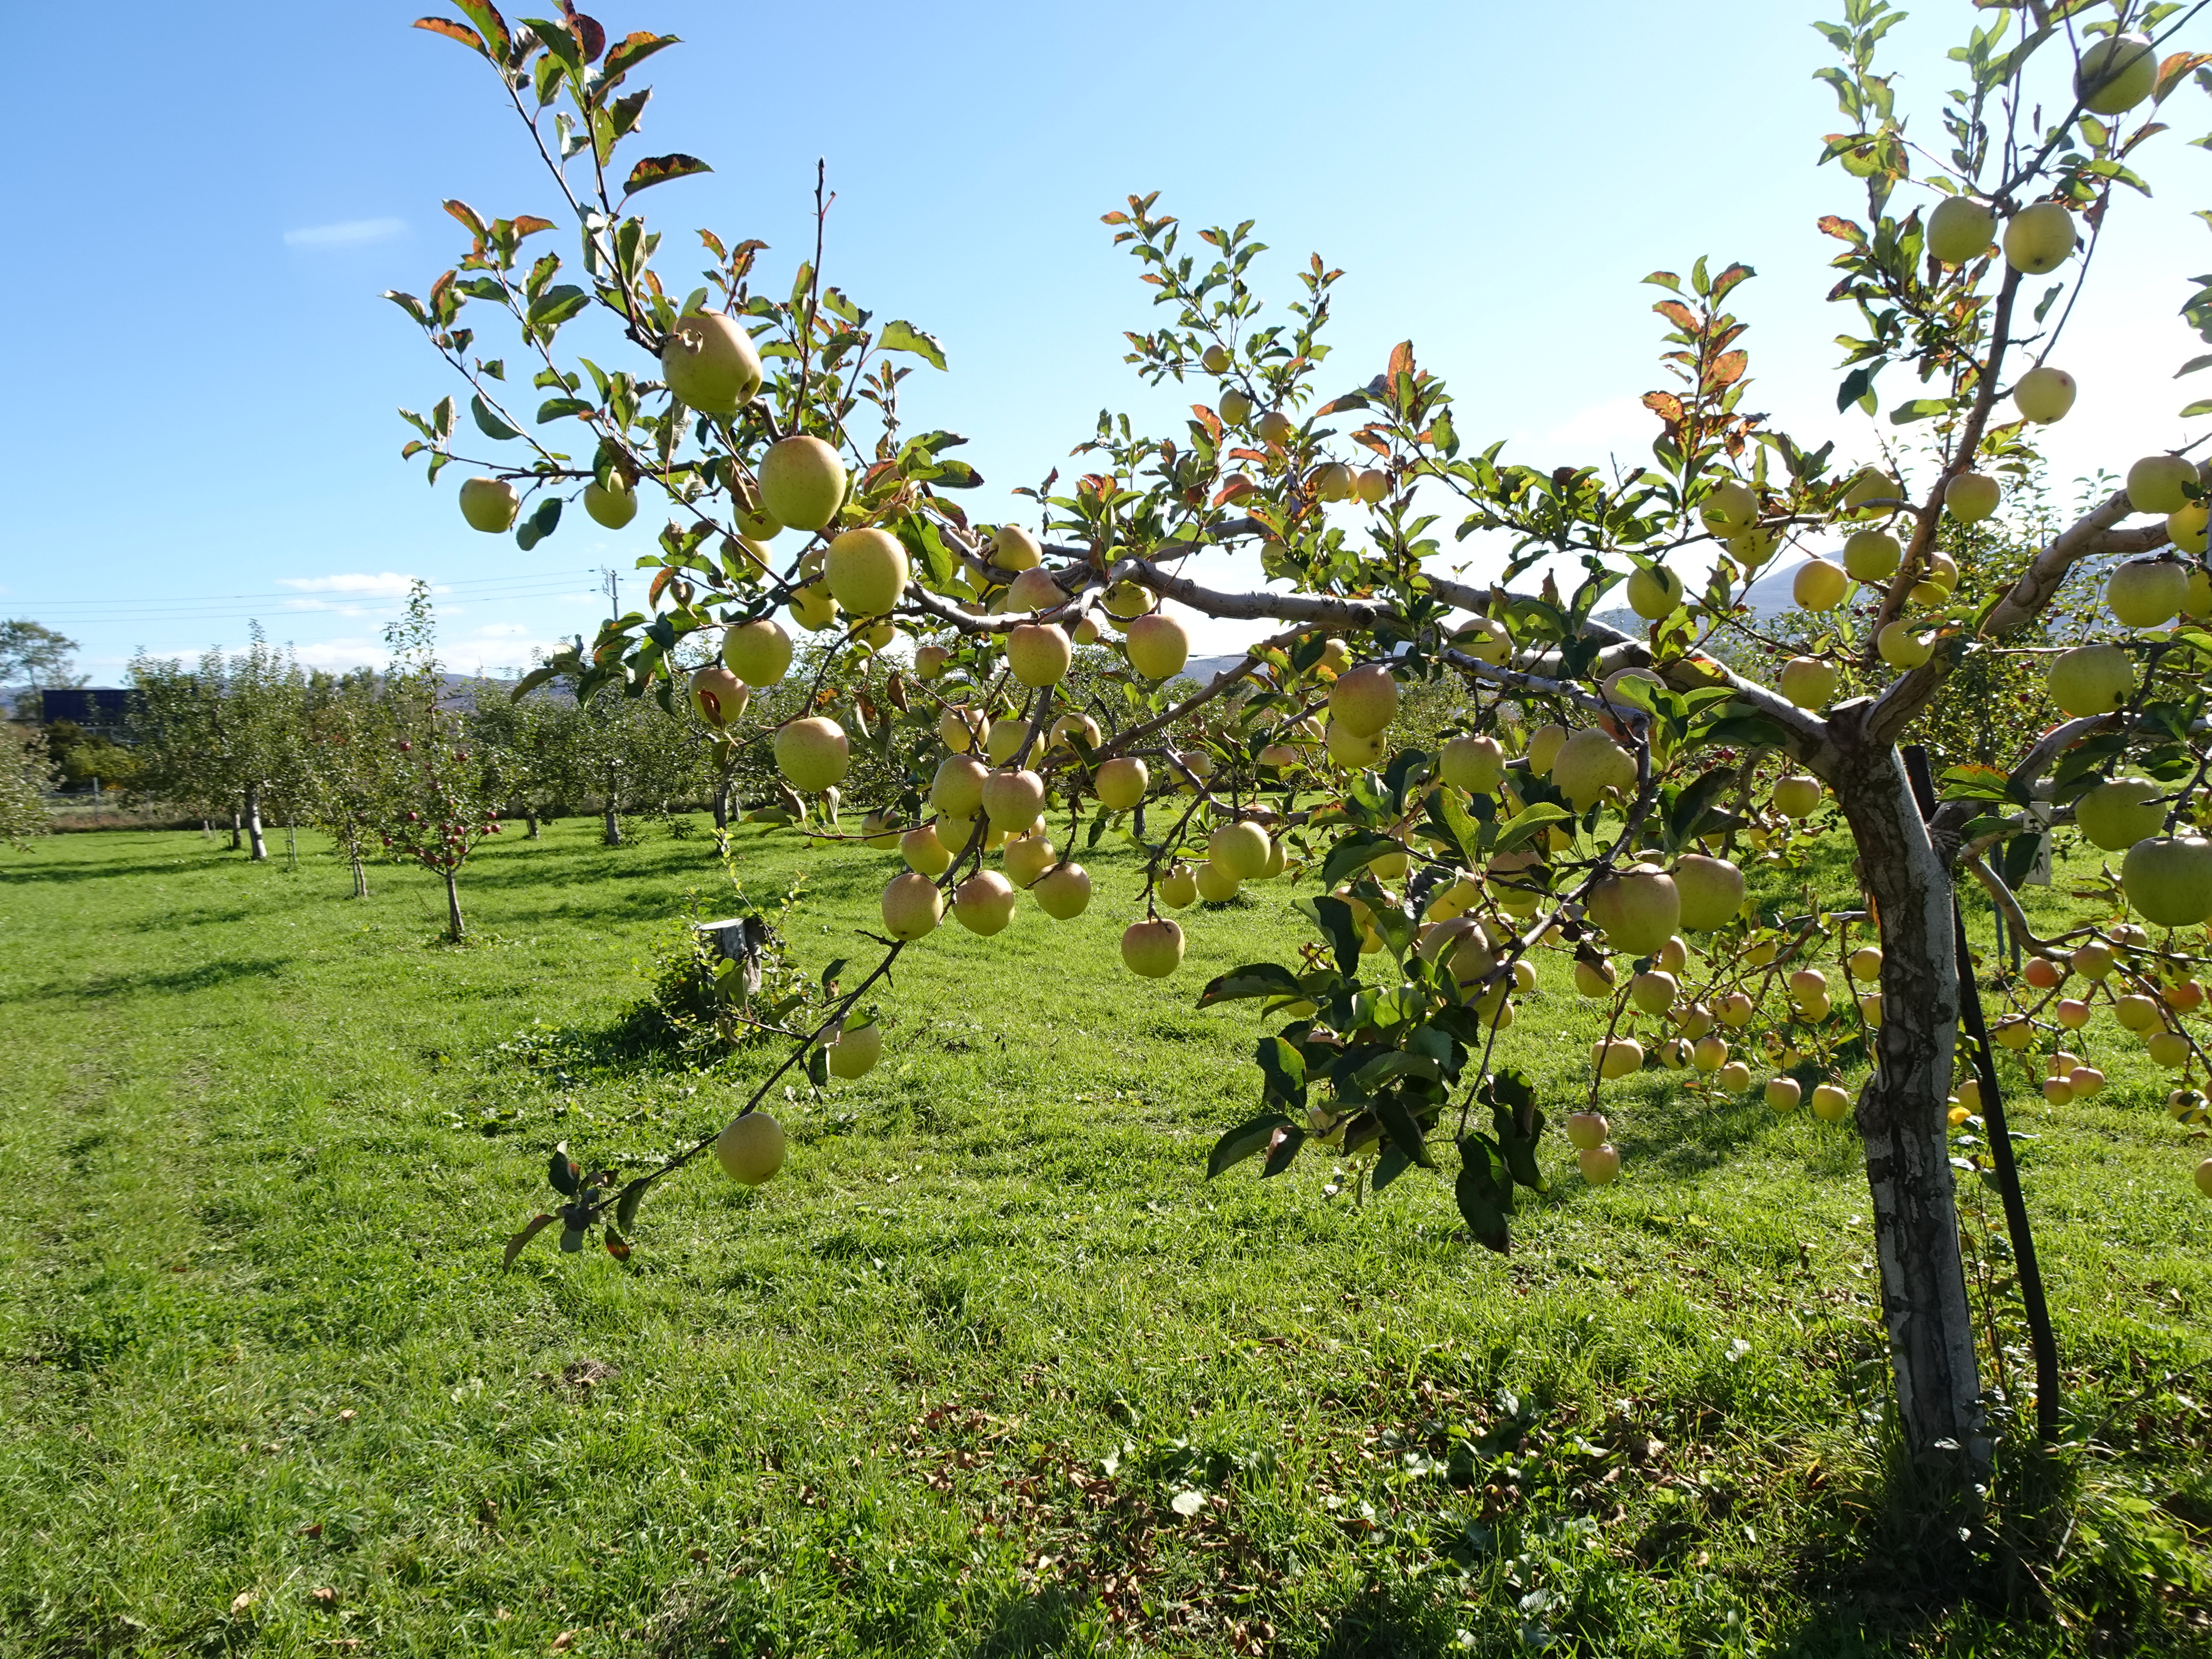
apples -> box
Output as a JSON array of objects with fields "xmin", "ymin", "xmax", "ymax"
[
  {"xmin": 940, "ymin": 704, "xmax": 990, "ymax": 755},
  {"xmin": 1101, "ymin": 579, "xmax": 1153, "ymax": 633},
  {"xmin": 716, "ymin": 1112, "xmax": 785, "ymax": 1185},
  {"xmin": 1509, "ymin": 960, "xmax": 1536, "ymax": 994},
  {"xmin": 2115, "ymin": 994, "xmax": 2158, "ymax": 1031},
  {"xmin": 1201, "ymin": 343, "xmax": 1231, "ymax": 376},
  {"xmin": 2048, "ymin": 644, "xmax": 2133, "ymax": 719},
  {"xmin": 1302, "ymin": 638, "xmax": 1352, "ymax": 692},
  {"xmin": 1780, "ymin": 656, "xmax": 1837, "ymax": 709},
  {"xmin": 1540, "ymin": 924, "xmax": 1560, "ymax": 945},
  {"xmin": 1001, "ymin": 814, "xmax": 1046, "ymax": 847},
  {"xmin": 1994, "ymin": 1013, "xmax": 2033, "ymax": 1049},
  {"xmin": 882, "ymin": 873, "xmax": 943, "ymax": 940},
  {"xmin": 1444, "ymin": 872, "xmax": 1483, "ymax": 910},
  {"xmin": 1034, "ymin": 862, "xmax": 1091, "ymax": 920},
  {"xmin": 1095, "ymin": 757, "xmax": 1148, "ymax": 810},
  {"xmin": 1307, "ymin": 1105, "xmax": 1345, "ymax": 1145},
  {"xmin": 1208, "ymin": 821, "xmax": 1270, "ymax": 881},
  {"xmin": 1793, "ymin": 559, "xmax": 1848, "ymax": 612},
  {"xmin": 1957, "ymin": 1080, "xmax": 1982, "ymax": 1113},
  {"xmin": 935, "ymin": 815, "xmax": 966, "ymax": 853},
  {"xmin": 950, "ymin": 529, "xmax": 977, "ymax": 549},
  {"xmin": 1368, "ymin": 853, "xmax": 1409, "ymax": 880},
  {"xmin": 1627, "ymin": 563, "xmax": 1683, "ymax": 620},
  {"xmin": 1342, "ymin": 465, "xmax": 1360, "ymax": 499},
  {"xmin": 1333, "ymin": 886, "xmax": 1371, "ymax": 923},
  {"xmin": 1126, "ymin": 614, "xmax": 1189, "ymax": 679},
  {"xmin": 987, "ymin": 525, "xmax": 1042, "ymax": 573},
  {"xmin": 1241, "ymin": 804, "xmax": 1273, "ymax": 833},
  {"xmin": 1861, "ymin": 992, "xmax": 1882, "ymax": 1027},
  {"xmin": 1567, "ymin": 1112, "xmax": 1608, "ymax": 1150},
  {"xmin": 1196, "ymin": 862, "xmax": 1238, "ymax": 902},
  {"xmin": 2148, "ymin": 1032, "xmax": 2190, "ymax": 1068},
  {"xmin": 1908, "ymin": 551, "xmax": 1959, "ymax": 605},
  {"xmin": 1259, "ymin": 411, "xmax": 1291, "ymax": 447},
  {"xmin": 1328, "ymin": 664, "xmax": 1397, "ymax": 738},
  {"xmin": 1765, "ymin": 1077, "xmax": 1801, "ymax": 1112},
  {"xmin": 1259, "ymin": 744, "xmax": 1298, "ymax": 769},
  {"xmin": 1843, "ymin": 530, "xmax": 1901, "ymax": 581},
  {"xmin": 1502, "ymin": 893, "xmax": 1540, "ymax": 917},
  {"xmin": 1790, "ymin": 969, "xmax": 1826, "ymax": 1002},
  {"xmin": 1429, "ymin": 838, "xmax": 1454, "ymax": 856},
  {"xmin": 2106, "ymin": 559, "xmax": 2188, "ymax": 627},
  {"xmin": 2163, "ymin": 979, "xmax": 2204, "ymax": 1013},
  {"xmin": 1673, "ymin": 1003, "xmax": 1710, "ymax": 1040},
  {"xmin": 1877, "ymin": 620, "xmax": 1935, "ymax": 670},
  {"xmin": 2043, "ymin": 1076, "xmax": 2074, "ymax": 1105},
  {"xmin": 1699, "ymin": 479, "xmax": 1758, "ymax": 539},
  {"xmin": 1795, "ymin": 992, "xmax": 1830, "ymax": 1023},
  {"xmin": 1267, "ymin": 840, "xmax": 1288, "ymax": 857},
  {"xmin": 2109, "ymin": 924, "xmax": 2147, "ymax": 960},
  {"xmin": 952, "ymin": 870, "xmax": 1015, "ymax": 936},
  {"xmin": 1315, "ymin": 463, "xmax": 1350, "ymax": 503},
  {"xmin": 1528, "ymin": 725, "xmax": 1580, "ymax": 777},
  {"xmin": 2174, "ymin": 826, "xmax": 2212, "ymax": 837},
  {"xmin": 1844, "ymin": 461, "xmax": 1901, "ymax": 520},
  {"xmin": 1003, "ymin": 835, "xmax": 1056, "ymax": 888},
  {"xmin": 1631, "ymin": 970, "xmax": 1676, "ymax": 1014},
  {"xmin": 1049, "ymin": 712, "xmax": 1101, "ymax": 754},
  {"xmin": 1749, "ymin": 812, "xmax": 1791, "ymax": 851},
  {"xmin": 1219, "ymin": 389, "xmax": 1251, "ymax": 426},
  {"xmin": 1589, "ymin": 862, "xmax": 1681, "ymax": 955},
  {"xmin": 1418, "ymin": 922, "xmax": 1440, "ymax": 942},
  {"xmin": 1551, "ymin": 728, "xmax": 1638, "ymax": 813},
  {"xmin": 2057, "ymin": 999, "xmax": 2090, "ymax": 1029},
  {"xmin": 584, "ymin": 471, "xmax": 637, "ymax": 529},
  {"xmin": 824, "ymin": 527, "xmax": 908, "ymax": 617},
  {"xmin": 721, "ymin": 534, "xmax": 771, "ymax": 582},
  {"xmin": 661, "ymin": 308, "xmax": 763, "ymax": 413},
  {"xmin": 2072, "ymin": 941, "xmax": 2114, "ymax": 980},
  {"xmin": 1440, "ymin": 735, "xmax": 1506, "ymax": 795},
  {"xmin": 1357, "ymin": 469, "xmax": 1388, "ymax": 503},
  {"xmin": 1364, "ymin": 921, "xmax": 1385, "ymax": 953},
  {"xmin": 1575, "ymin": 960, "xmax": 1616, "ymax": 998},
  {"xmin": 1591, "ymin": 1037, "xmax": 1643, "ymax": 1079},
  {"xmin": 1169, "ymin": 751, "xmax": 1211, "ymax": 795},
  {"xmin": 1596, "ymin": 667, "xmax": 1668, "ymax": 741},
  {"xmin": 2013, "ymin": 367, "xmax": 2076, "ymax": 425},
  {"xmin": 1580, "ymin": 1143, "xmax": 1620, "ymax": 1184},
  {"xmin": 1455, "ymin": 618, "xmax": 1512, "ymax": 666},
  {"xmin": 902, "ymin": 825, "xmax": 954, "ymax": 876},
  {"xmin": 1222, "ymin": 472, "xmax": 1255, "ymax": 507},
  {"xmin": 953, "ymin": 811, "xmax": 1008, "ymax": 852},
  {"xmin": 1393, "ymin": 824, "xmax": 1414, "ymax": 846},
  {"xmin": 915, "ymin": 646, "xmax": 949, "ymax": 679},
  {"xmin": 1726, "ymin": 519, "xmax": 1781, "ymax": 567},
  {"xmin": 1667, "ymin": 854, "xmax": 1744, "ymax": 932},
  {"xmin": 1945, "ymin": 473, "xmax": 2001, "ymax": 523},
  {"xmin": 1006, "ymin": 624, "xmax": 1072, "ymax": 687},
  {"xmin": 2166, "ymin": 500, "xmax": 2212, "ymax": 554},
  {"xmin": 2154, "ymin": 953, "xmax": 2194, "ymax": 986},
  {"xmin": 2168, "ymin": 1089, "xmax": 2208, "ymax": 1124},
  {"xmin": 2024, "ymin": 957, "xmax": 2061, "ymax": 988},
  {"xmin": 1765, "ymin": 1036, "xmax": 1799, "ymax": 1069},
  {"xmin": 1292, "ymin": 716, "xmax": 1325, "ymax": 753},
  {"xmin": 1379, "ymin": 889, "xmax": 1397, "ymax": 908},
  {"xmin": 1484, "ymin": 913, "xmax": 1515, "ymax": 942},
  {"xmin": 733, "ymin": 485, "xmax": 784, "ymax": 541},
  {"xmin": 2073, "ymin": 34, "xmax": 2159, "ymax": 115},
  {"xmin": 2121, "ymin": 836, "xmax": 2212, "ymax": 926},
  {"xmin": 1660, "ymin": 1038, "xmax": 1695, "ymax": 1070},
  {"xmin": 1327, "ymin": 718, "xmax": 1387, "ymax": 768},
  {"xmin": 1307, "ymin": 1029, "xmax": 1344, "ymax": 1052},
  {"xmin": 2195, "ymin": 1158, "xmax": 2212, "ymax": 1199},
  {"xmin": 1849, "ymin": 947, "xmax": 1883, "ymax": 982},
  {"xmin": 2075, "ymin": 777, "xmax": 2167, "ymax": 852},
  {"xmin": 1741, "ymin": 930, "xmax": 1777, "ymax": 966},
  {"xmin": 848, "ymin": 617, "xmax": 896, "ymax": 650},
  {"xmin": 1007, "ymin": 566, "xmax": 1069, "ymax": 614},
  {"xmin": 774, "ymin": 716, "xmax": 849, "ymax": 792},
  {"xmin": 722, "ymin": 619, "xmax": 792, "ymax": 687},
  {"xmin": 964, "ymin": 552, "xmax": 1008, "ymax": 596},
  {"xmin": 987, "ymin": 719, "xmax": 1045, "ymax": 770},
  {"xmin": 861, "ymin": 811, "xmax": 903, "ymax": 850},
  {"xmin": 2003, "ymin": 202, "xmax": 2076, "ymax": 274},
  {"xmin": 1812, "ymin": 1085, "xmax": 1848, "ymax": 1121},
  {"xmin": 2126, "ymin": 456, "xmax": 2200, "ymax": 514},
  {"xmin": 459, "ymin": 476, "xmax": 519, "ymax": 533},
  {"xmin": 757, "ymin": 435, "xmax": 847, "ymax": 532},
  {"xmin": 799, "ymin": 549, "xmax": 835, "ymax": 601},
  {"xmin": 1716, "ymin": 991, "xmax": 1752, "ymax": 1027},
  {"xmin": 1121, "ymin": 919, "xmax": 1185, "ymax": 978},
  {"xmin": 1696, "ymin": 1036, "xmax": 1728, "ymax": 1068},
  {"xmin": 1416, "ymin": 918, "xmax": 1509, "ymax": 1018},
  {"xmin": 818, "ymin": 1021, "xmax": 881, "ymax": 1079},
  {"xmin": 955, "ymin": 603, "xmax": 988, "ymax": 616},
  {"xmin": 1481, "ymin": 998, "xmax": 1514, "ymax": 1030},
  {"xmin": 1701, "ymin": 832, "xmax": 1725, "ymax": 848},
  {"xmin": 2047, "ymin": 1052, "xmax": 2081, "ymax": 1078},
  {"xmin": 931, "ymin": 755, "xmax": 990, "ymax": 820},
  {"xmin": 2069, "ymin": 1066, "xmax": 2105, "ymax": 1097},
  {"xmin": 1870, "ymin": 1038, "xmax": 1880, "ymax": 1063},
  {"xmin": 1427, "ymin": 896, "xmax": 1462, "ymax": 923},
  {"xmin": 1773, "ymin": 775, "xmax": 1821, "ymax": 818},
  {"xmin": 1073, "ymin": 618, "xmax": 1100, "ymax": 645},
  {"xmin": 2182, "ymin": 566, "xmax": 2212, "ymax": 618},
  {"xmin": 1256, "ymin": 839, "xmax": 1287, "ymax": 879},
  {"xmin": 2137, "ymin": 1008, "xmax": 2172, "ymax": 1042},
  {"xmin": 789, "ymin": 587, "xmax": 840, "ymax": 631},
  {"xmin": 1486, "ymin": 851, "xmax": 1544, "ymax": 906},
  {"xmin": 1649, "ymin": 935, "xmax": 1687, "ymax": 975},
  {"xmin": 1926, "ymin": 196, "xmax": 1997, "ymax": 264},
  {"xmin": 1157, "ymin": 864, "xmax": 1197, "ymax": 909},
  {"xmin": 982, "ymin": 768, "xmax": 1045, "ymax": 832},
  {"xmin": 1720, "ymin": 1061, "xmax": 1750, "ymax": 1092},
  {"xmin": 1693, "ymin": 1047, "xmax": 1717, "ymax": 1072},
  {"xmin": 1467, "ymin": 908, "xmax": 1487, "ymax": 923},
  {"xmin": 689, "ymin": 668, "xmax": 749, "ymax": 725}
]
